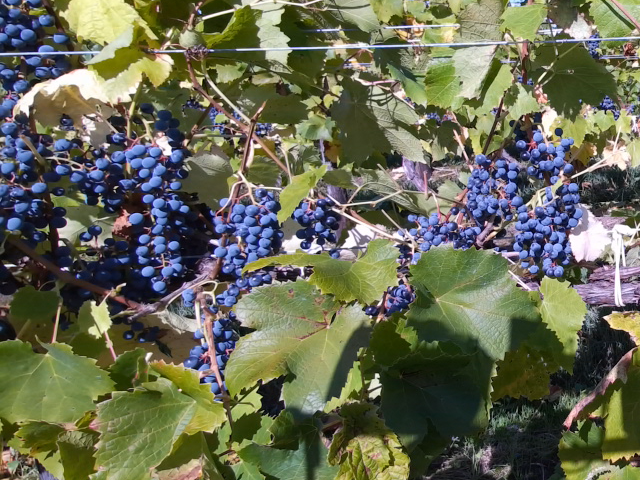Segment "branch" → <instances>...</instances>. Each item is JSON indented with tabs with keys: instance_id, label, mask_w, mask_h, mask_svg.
<instances>
[{
	"instance_id": "obj_3",
	"label": "branch",
	"mask_w": 640,
	"mask_h": 480,
	"mask_svg": "<svg viewBox=\"0 0 640 480\" xmlns=\"http://www.w3.org/2000/svg\"><path fill=\"white\" fill-rule=\"evenodd\" d=\"M503 108H504V99L500 98L499 99V105H498V108H497V111H496V116L493 118V121H492V123L490 125L489 131L487 133V137H486V139L484 141V144H483V147H482V153L483 154L487 153V150H488L489 144L491 142L495 127L498 124V121L501 119V114H502Z\"/></svg>"
},
{
	"instance_id": "obj_5",
	"label": "branch",
	"mask_w": 640,
	"mask_h": 480,
	"mask_svg": "<svg viewBox=\"0 0 640 480\" xmlns=\"http://www.w3.org/2000/svg\"><path fill=\"white\" fill-rule=\"evenodd\" d=\"M220 267H221V259L217 258L210 272L211 279H214L216 277V275L219 273Z\"/></svg>"
},
{
	"instance_id": "obj_1",
	"label": "branch",
	"mask_w": 640,
	"mask_h": 480,
	"mask_svg": "<svg viewBox=\"0 0 640 480\" xmlns=\"http://www.w3.org/2000/svg\"><path fill=\"white\" fill-rule=\"evenodd\" d=\"M185 61L187 62L188 65V69H189V73H190V77H191V81L192 84L194 86V88L196 89V91L206 100H208L209 102H212L216 109L218 110V112L220 113L221 116H223L224 118H227L229 120H232L234 123H236L240 128H242L244 130V132L246 133L245 136V146H244V152L242 155V161L240 163V166L238 167V170L236 172V184L233 186V195L231 197L230 203H229V208H228V212L226 214L225 217V221L229 222L231 220L232 214H233V210H234V206H235V202L237 200L238 197V193L240 191V187H241V175L243 173V170L245 168V165L247 163V157L249 155V148H250V138H252L253 140H255L258 145L260 146V148L266 152L274 161L275 163L284 171L287 172L288 171V167L271 151L270 148H268L265 143L262 141V139L260 137H258L254 132H253V126L254 123L258 121V119L261 117V112L260 111H254L251 115V118L249 120L248 123V127L242 123L237 117H235L234 115H231L229 113H227L221 106V104L219 103L218 100H216L214 97L210 96L209 94H207L198 84L197 79H196V75H195V70L193 67V63L192 60L189 56L185 57Z\"/></svg>"
},
{
	"instance_id": "obj_2",
	"label": "branch",
	"mask_w": 640,
	"mask_h": 480,
	"mask_svg": "<svg viewBox=\"0 0 640 480\" xmlns=\"http://www.w3.org/2000/svg\"><path fill=\"white\" fill-rule=\"evenodd\" d=\"M196 298L201 303L203 317L207 320L205 340H206V346H207V353H208L210 364H211V371H212V374L214 375V378L217 381H220L222 379V375L218 369V362H217L216 354L214 351V344H213V338H212L213 327H214V314L212 312H209L207 297L201 290H198L196 292Z\"/></svg>"
},
{
	"instance_id": "obj_4",
	"label": "branch",
	"mask_w": 640,
	"mask_h": 480,
	"mask_svg": "<svg viewBox=\"0 0 640 480\" xmlns=\"http://www.w3.org/2000/svg\"><path fill=\"white\" fill-rule=\"evenodd\" d=\"M345 212L348 213L353 218L357 219L358 221L362 222L364 225H366L368 227H371L373 230H377L378 229V226L375 223H373V222L365 219L361 215L355 213L352 209L346 208Z\"/></svg>"
}]
</instances>
